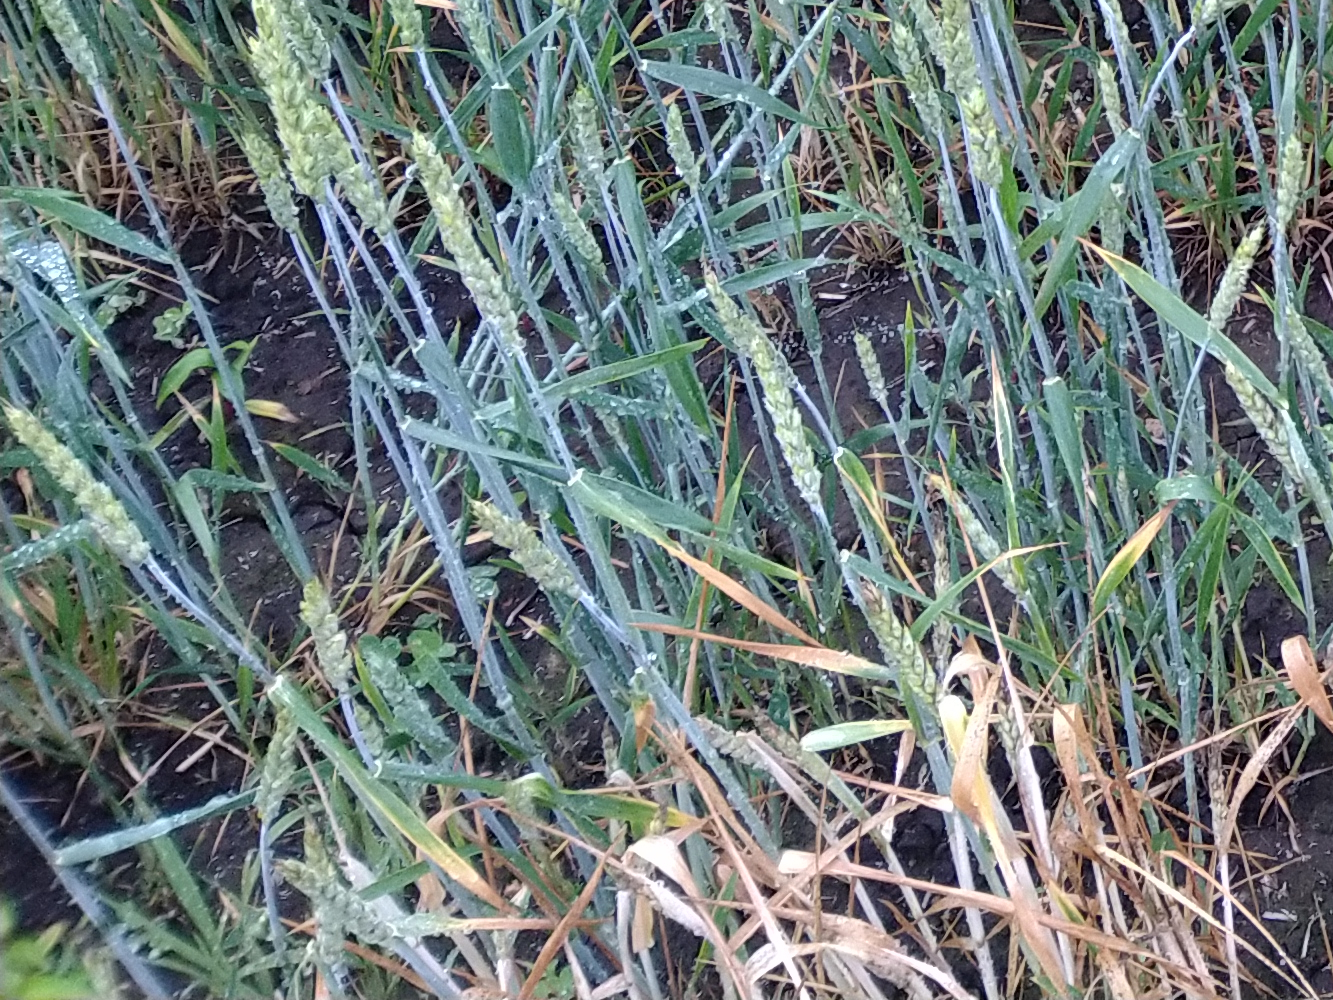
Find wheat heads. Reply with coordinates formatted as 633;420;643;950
5;411;149;560
887;185;917;244
937;176;959;247
302;586;351;680
304;809;349;977
860;585;940;706
257;714;292;814
932;532;946;665
253;44;322;191
961;79;1005;180
441;225;522;345
666;105;699;176
1276;133;1303;237
1100;64;1126;132
695;723;756;764
942;0;975;86
244;135;299;232
412;135;470;247
1282;314;1325;378
40;0;97;70
852;331;893;418
553;193;607;256
989;675;1026;753
271;856;392;939
355;696;386;766
374;664;432;727
374;0;425;47
752;340;822;505
316;104;355;174
438;0;492;59
1221;361;1290;476
1214;224;1264;331
905;0;940;54
254;0;338;74
334;173;390;229
692;0;736;35
932;475;1019;589
754;709;799;754
1318;655;1333;734
472;502;565;588
705;269;798;386
572;87;603;168
892;23;939;131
